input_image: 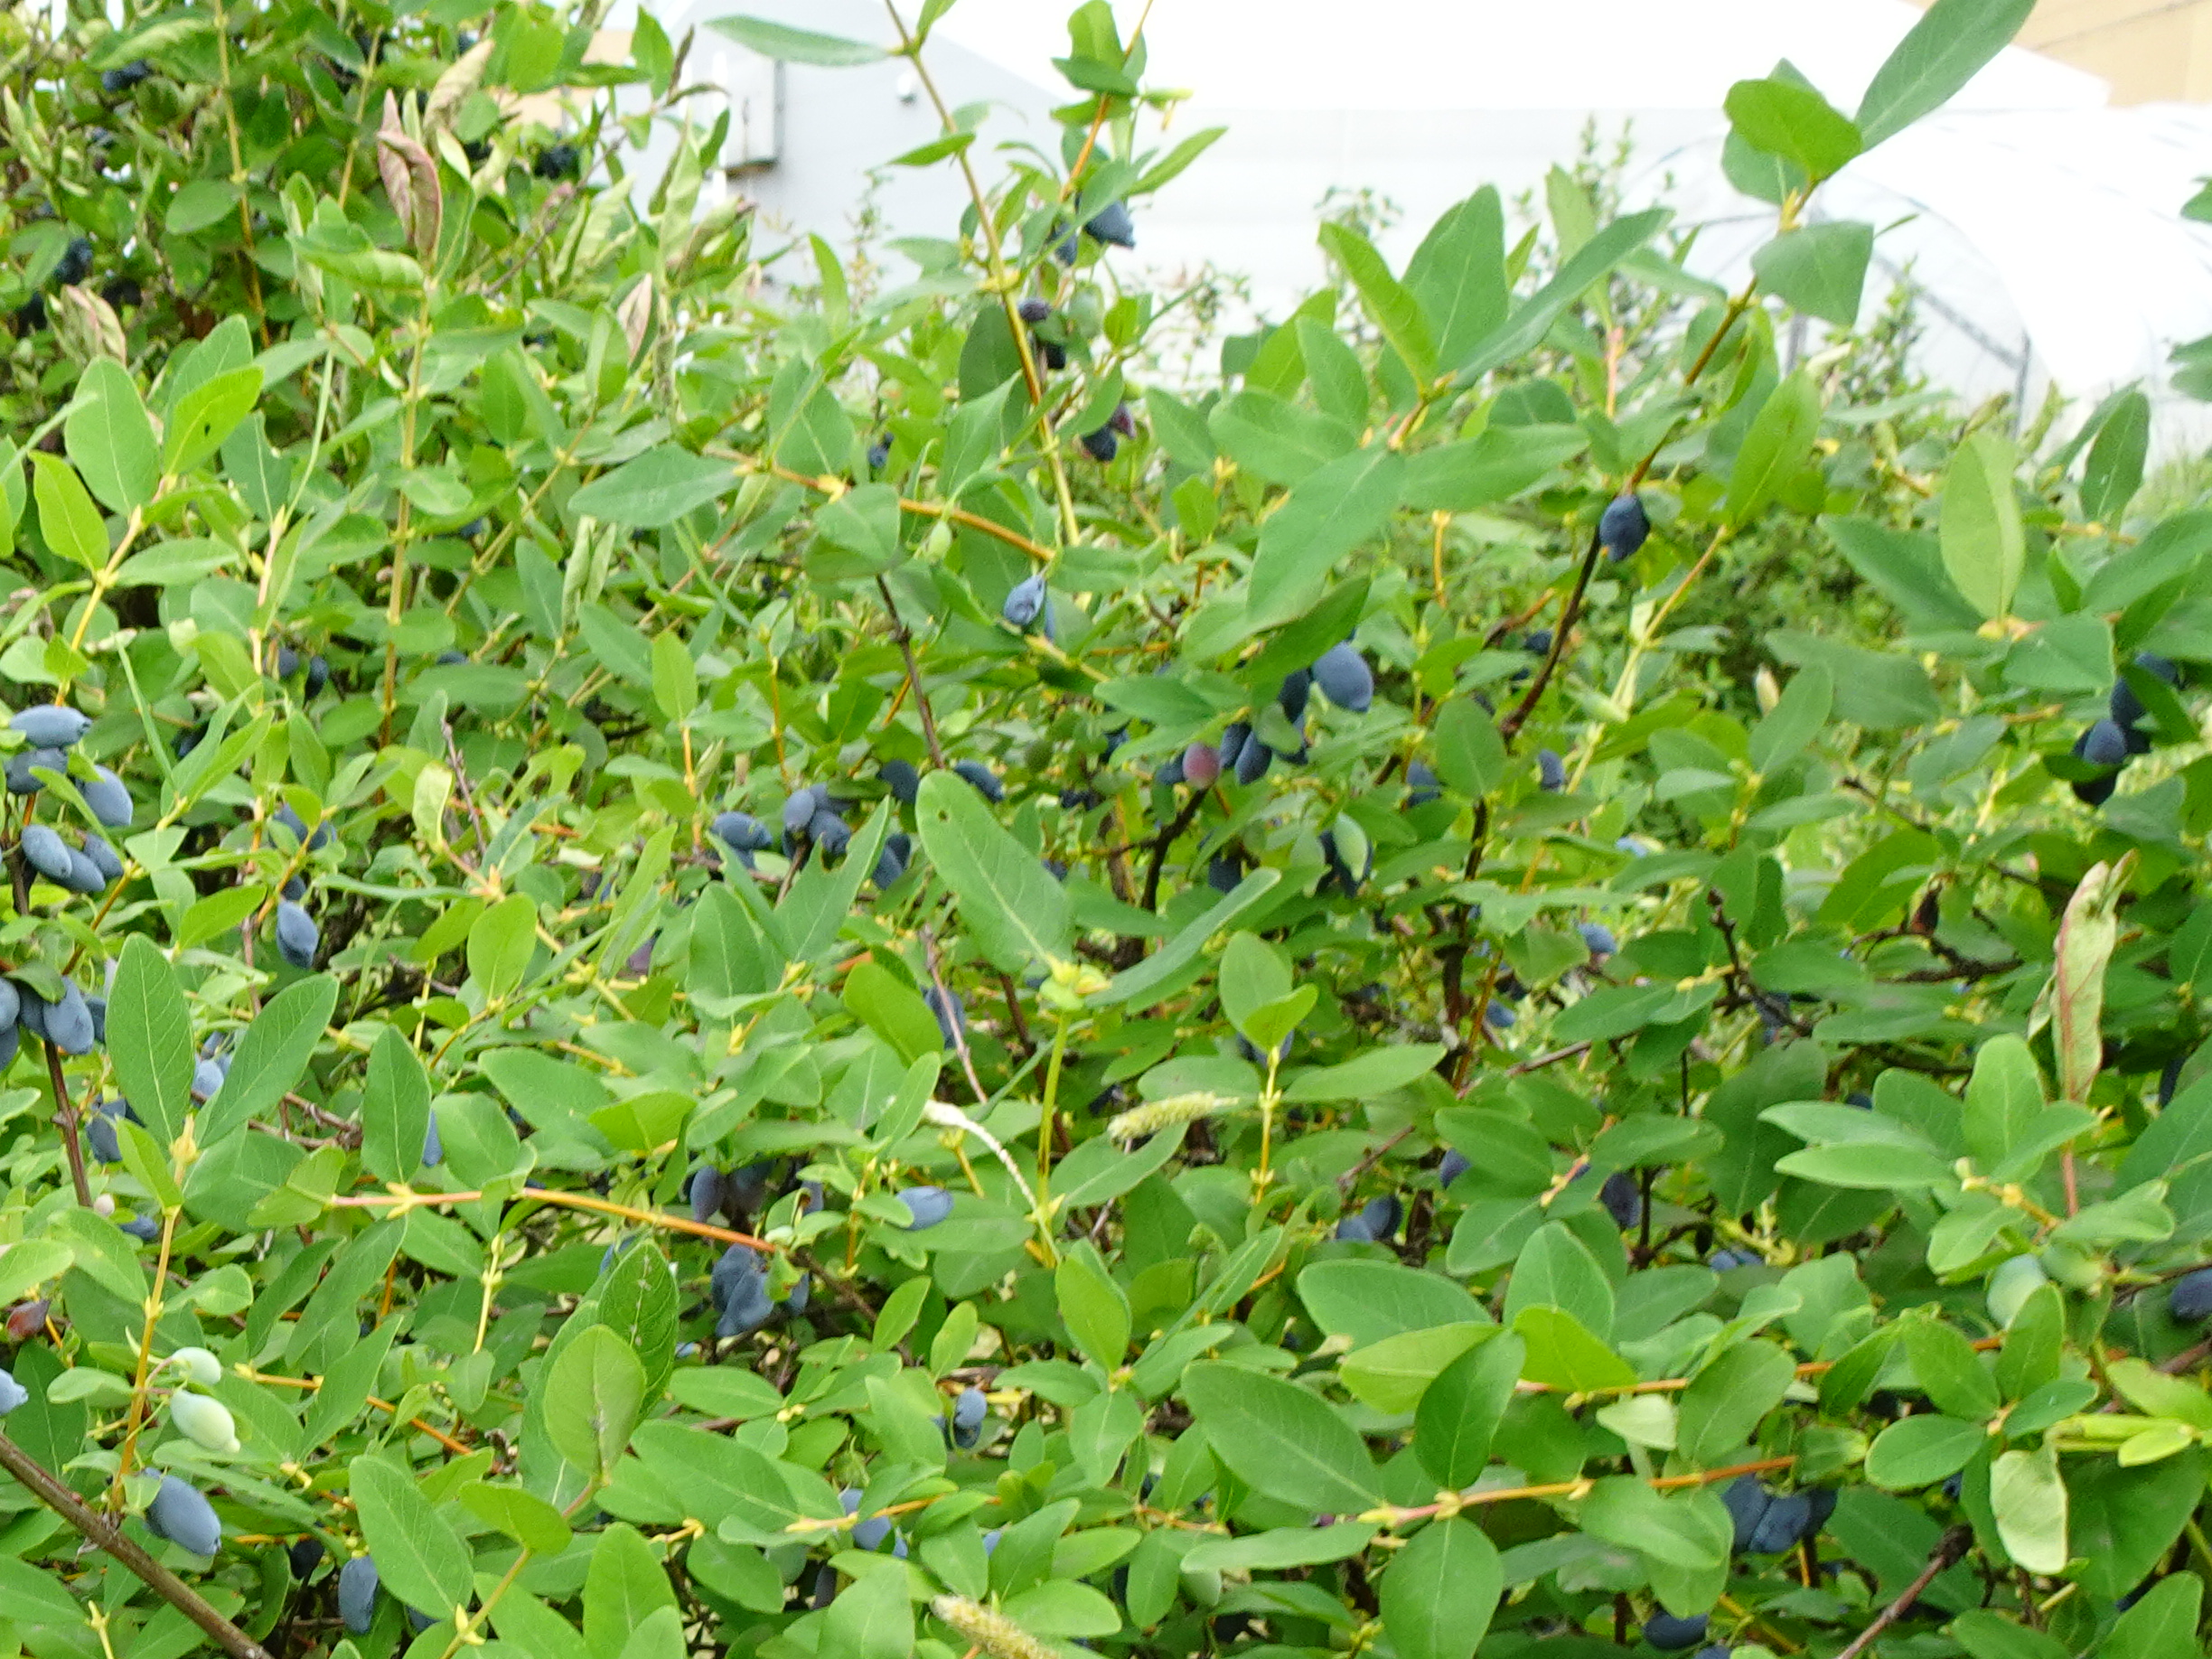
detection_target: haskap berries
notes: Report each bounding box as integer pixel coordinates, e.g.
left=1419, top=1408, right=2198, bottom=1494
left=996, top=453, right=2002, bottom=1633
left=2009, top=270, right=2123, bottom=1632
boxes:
left=1143, top=1477, right=1150, bottom=1491
left=1062, top=791, right=1084, bottom=810
left=1943, top=1476, right=1961, bottom=1496
left=45, top=982, right=95, bottom=1055
left=1602, top=1165, right=1644, bottom=1223
left=0, top=978, right=16, bottom=1038
left=282, top=875, right=311, bottom=902
left=1366, top=1197, right=1389, bottom=1234
left=78, top=763, right=138, bottom=827
left=1045, top=861, right=1067, bottom=877
left=1439, top=1151, right=1462, bottom=1186
left=462, top=521, right=482, bottom=535
left=278, top=898, right=315, bottom=954
left=467, top=143, right=478, bottom=155
left=713, top=1266, right=774, bottom=1331
left=180, top=733, right=200, bottom=752
left=86, top=1100, right=129, bottom=1161
left=1278, top=663, right=1312, bottom=725
left=869, top=448, right=887, bottom=469
left=102, top=71, right=123, bottom=89
left=117, top=278, right=146, bottom=307
left=1208, top=852, right=1240, bottom=893
left=1026, top=739, right=1053, bottom=771
left=780, top=1268, right=809, bottom=1316
left=1642, top=1612, right=1711, bottom=1651
left=1336, top=808, right=1368, bottom=874
left=765, top=1539, right=809, bottom=1581
left=890, top=1187, right=952, bottom=1227
left=811, top=809, right=850, bottom=860
left=7, top=1294, right=55, bottom=1341
left=399, top=1259, right=412, bottom=1277
left=1384, top=1196, right=1405, bottom=1235
left=957, top=1387, right=987, bottom=1427
left=1301, top=956, right=1314, bottom=967
left=1028, top=976, right=1048, bottom=987
left=846, top=1487, right=891, bottom=1551
left=187, top=1059, right=226, bottom=1099
left=34, top=259, right=81, bottom=302
left=1318, top=835, right=1340, bottom=885
left=203, top=1033, right=228, bottom=1056
left=40, top=839, right=106, bottom=899
left=1237, top=1297, right=1251, bottom=1319
left=84, top=998, right=107, bottom=1039
left=425, top=1110, right=443, bottom=1167
left=101, top=289, right=124, bottom=315
left=1083, top=195, right=1134, bottom=245
left=0, top=1028, right=20, bottom=1080
left=1763, top=1027, right=1775, bottom=1043
left=1808, top=1484, right=1836, bottom=1530
left=783, top=834, right=799, bottom=858
left=1511, top=982, right=1527, bottom=1000
left=25, top=819, right=75, bottom=878
left=92, top=159, right=105, bottom=175
left=1185, top=741, right=1222, bottom=791
left=1252, top=1030, right=1293, bottom=1062
left=2043, top=1237, right=2108, bottom=1290
left=884, top=433, right=894, bottom=447
left=1087, top=795, right=1105, bottom=807
left=360, top=1325, right=368, bottom=1337
left=279, top=935, right=314, bottom=970
left=1539, top=751, right=1565, bottom=785
left=0, top=1363, right=29, bottom=1411
left=76, top=838, right=129, bottom=877
left=1023, top=301, right=1053, bottom=319
left=636, top=586, right=667, bottom=609
left=266, top=797, right=333, bottom=858
left=922, top=980, right=965, bottom=1048
left=123, top=62, right=149, bottom=78
left=1617, top=840, right=1647, bottom=857
left=1110, top=403, right=1132, bottom=436
left=1725, top=1479, right=1766, bottom=1551
left=1032, top=313, right=1073, bottom=343
left=1841, top=1093, right=1871, bottom=1108
left=1103, top=729, right=1128, bottom=757
left=1134, top=1134, right=1151, bottom=1149
left=120, top=1210, right=166, bottom=1240
left=1752, top=1495, right=1812, bottom=1552
left=953, top=760, right=1010, bottom=799
left=1598, top=489, right=1647, bottom=560
left=1511, top=631, right=1550, bottom=692
left=1322, top=641, right=1372, bottom=711
left=1741, top=1212, right=1754, bottom=1235
left=131, top=588, right=157, bottom=627
left=2112, top=651, right=2170, bottom=756
left=1158, top=756, right=1186, bottom=787
left=1004, top=580, right=1043, bottom=620
left=1115, top=1567, right=1129, bottom=1601
left=628, top=943, right=651, bottom=972
left=1919, top=892, right=1937, bottom=926
left=1696, top=1228, right=1712, bottom=1253
left=1080, top=429, right=1116, bottom=463
left=544, top=146, right=574, bottom=177
left=2160, top=1060, right=2180, bottom=1103
left=523, top=334, right=544, bottom=346
left=149, top=1471, right=223, bottom=1551
left=713, top=812, right=774, bottom=847
left=2166, top=1265, right=2209, bottom=1324
left=511, top=1109, right=523, bottom=1124
left=1352, top=988, right=1376, bottom=1001
left=1, top=753, right=60, bottom=800
left=721, top=1164, right=764, bottom=1218
left=983, top=1529, right=1007, bottom=1551
left=433, top=652, right=477, bottom=668
left=815, top=1567, right=837, bottom=1608
left=1070, top=290, right=1104, bottom=343
left=418, top=91, right=427, bottom=111
left=783, top=788, right=814, bottom=830
left=305, top=656, right=327, bottom=695
left=1220, top=1615, right=1246, bottom=1640
left=92, top=128, right=113, bottom=146
left=1487, top=1003, right=1515, bottom=1027
left=708, top=1248, right=762, bottom=1315
left=1279, top=747, right=1310, bottom=766
left=299, top=1592, right=315, bottom=1616
left=889, top=833, right=910, bottom=860
left=442, top=574, right=457, bottom=594
left=879, top=754, right=921, bottom=802
left=1821, top=1242, right=1840, bottom=1258
left=1053, top=218, right=1079, bottom=266
left=1910, top=1398, right=1933, bottom=1416
left=7, top=696, right=93, bottom=755
left=273, top=648, right=297, bottom=677
left=1235, top=736, right=1272, bottom=782
left=1090, top=1093, right=1109, bottom=1111
left=1046, top=342, right=1068, bottom=370
left=20, top=994, right=43, bottom=1032
left=1292, top=827, right=1323, bottom=898
left=1374, top=911, right=1390, bottom=930
left=865, top=855, right=900, bottom=892
left=2086, top=717, right=2127, bottom=768
left=174, top=1343, right=230, bottom=1383
left=1221, top=725, right=1244, bottom=767
left=1757, top=994, right=1791, bottom=1026
left=338, top=1556, right=380, bottom=1632
left=1581, top=922, right=1617, bottom=955
left=460, top=38, right=470, bottom=50
left=407, top=1607, right=441, bottom=1632
left=73, top=241, right=93, bottom=261
left=533, top=152, right=548, bottom=176
left=677, top=1344, right=692, bottom=1356
left=1987, top=1249, right=2052, bottom=1329
left=813, top=785, right=847, bottom=809
left=1708, top=1251, right=1737, bottom=1269
left=291, top=1536, right=324, bottom=1578
left=1407, top=756, right=1441, bottom=805
left=1867, top=1391, right=1899, bottom=1417
left=1466, top=905, right=1480, bottom=921
left=1180, top=1571, right=1221, bottom=1609
left=601, top=1247, right=615, bottom=1270
left=692, top=1168, right=719, bottom=1224
left=2073, top=728, right=2117, bottom=803
left=170, top=1394, right=239, bottom=1446
left=800, top=1177, right=825, bottom=1213
left=938, top=1419, right=982, bottom=1449
left=1337, top=1214, right=1372, bottom=1238
left=1737, top=1252, right=1764, bottom=1264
